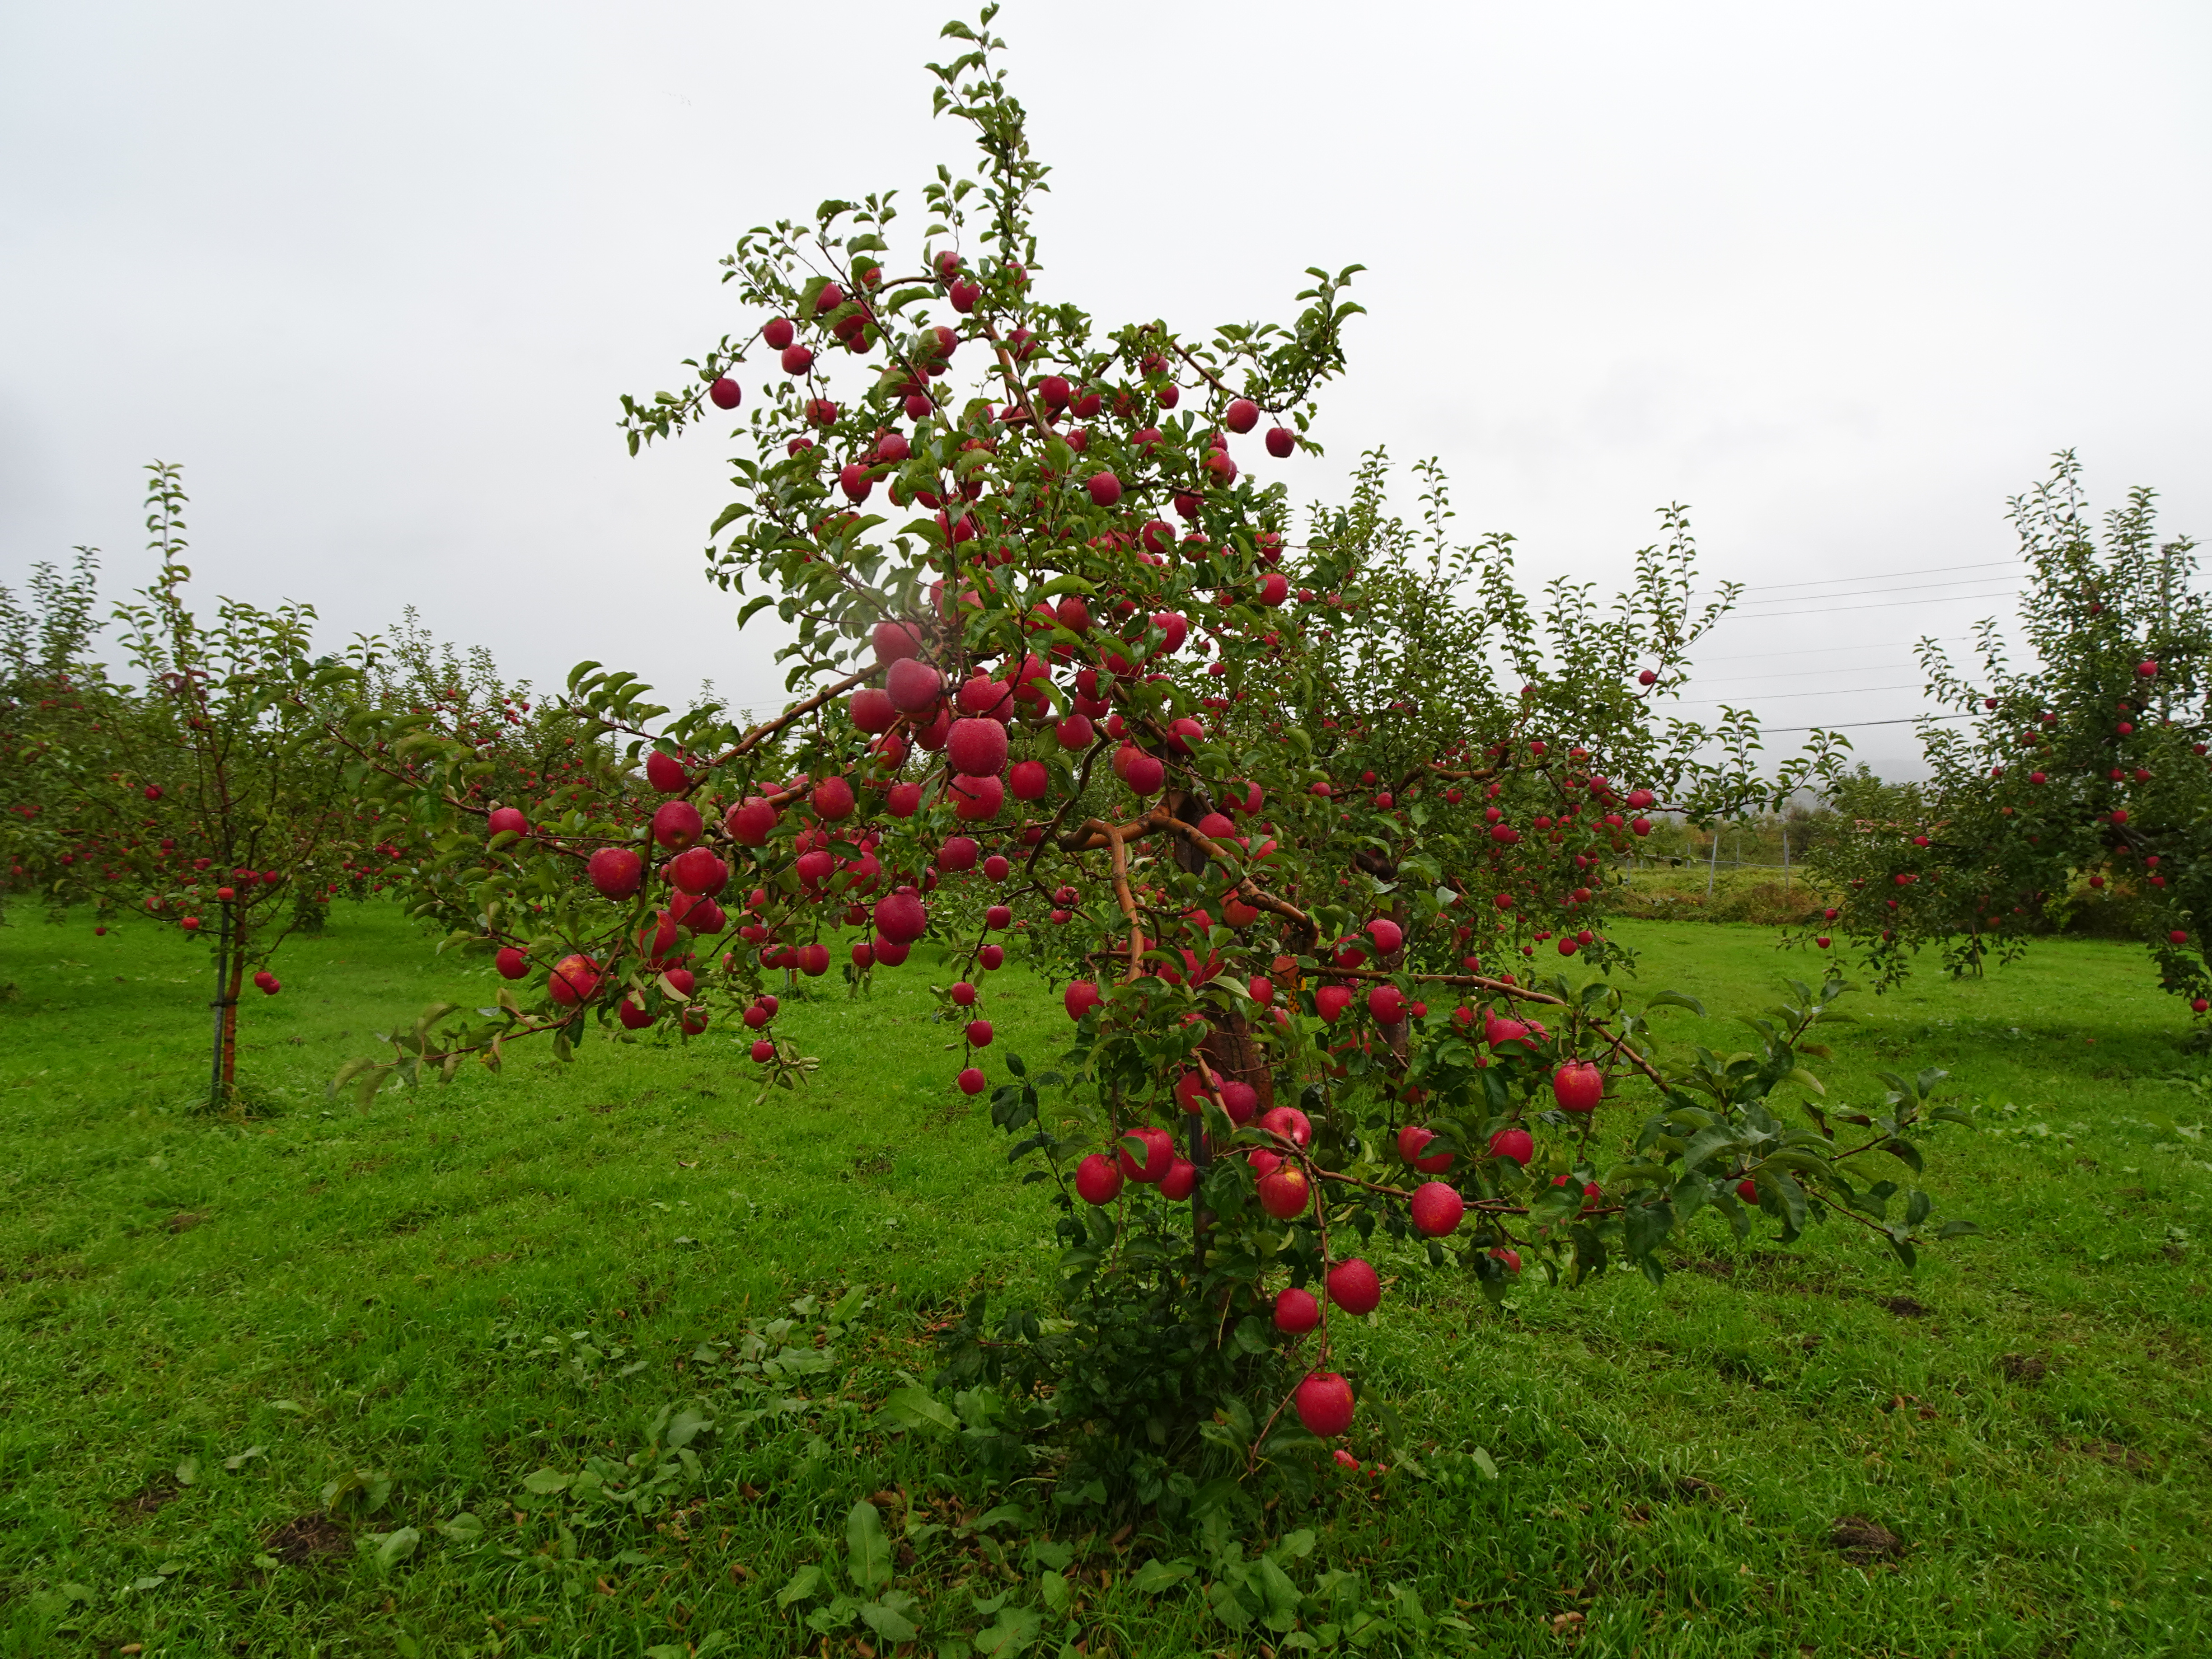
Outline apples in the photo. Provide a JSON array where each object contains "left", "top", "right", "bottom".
[
  {"left": 806, "top": 399, "right": 837, "bottom": 428},
  {"left": 957, "top": 674, "right": 1014, "bottom": 724},
  {"left": 1044, "top": 407, "right": 1061, "bottom": 426},
  {"left": 1209, "top": 460, "right": 1237, "bottom": 489},
  {"left": 1055, "top": 886, "right": 1079, "bottom": 906},
  {"left": 958, "top": 485, "right": 983, "bottom": 500},
  {"left": 1365, "top": 920, "right": 1402, "bottom": 956},
  {"left": 1248, "top": 835, "right": 1280, "bottom": 870},
  {"left": 858, "top": 453, "right": 889, "bottom": 482},
  {"left": 1411, "top": 1183, "right": 1463, "bottom": 1237},
  {"left": 1197, "top": 813, "right": 1235, "bottom": 849},
  {"left": 1075, "top": 1154, "right": 1124, "bottom": 1206},
  {"left": 1133, "top": 428, "right": 1165, "bottom": 459},
  {"left": 911, "top": 708, "right": 952, "bottom": 751},
  {"left": 1101, "top": 589, "right": 1134, "bottom": 621},
  {"left": 949, "top": 280, "right": 980, "bottom": 313},
  {"left": 704, "top": 858, "right": 728, "bottom": 897},
  {"left": 1453, "top": 1006, "right": 1495, "bottom": 1044},
  {"left": 739, "top": 910, "right": 763, "bottom": 925},
  {"left": 1161, "top": 949, "right": 1205, "bottom": 990},
  {"left": 958, "top": 1068, "right": 985, "bottom": 1095},
  {"left": 647, "top": 743, "right": 695, "bottom": 793},
  {"left": 757, "top": 782, "right": 788, "bottom": 826},
  {"left": 791, "top": 549, "right": 815, "bottom": 563},
  {"left": 1164, "top": 1061, "right": 1187, "bottom": 1080},
  {"left": 971, "top": 408, "right": 993, "bottom": 424},
  {"left": 958, "top": 465, "right": 984, "bottom": 489},
  {"left": 1202, "top": 1127, "right": 1208, "bottom": 1146},
  {"left": 886, "top": 658, "right": 941, "bottom": 713},
  {"left": 487, "top": 807, "right": 528, "bottom": 847},
  {"left": 953, "top": 552, "right": 982, "bottom": 579},
  {"left": 874, "top": 895, "right": 925, "bottom": 945},
  {"left": 813, "top": 517, "right": 841, "bottom": 539},
  {"left": 809, "top": 887, "right": 837, "bottom": 905},
  {"left": 901, "top": 369, "right": 929, "bottom": 397},
  {"left": 1150, "top": 613, "right": 1187, "bottom": 653},
  {"left": 1003, "top": 653, "right": 1050, "bottom": 704},
  {"left": 1076, "top": 669, "right": 1111, "bottom": 701},
  {"left": 967, "top": 1020, "right": 993, "bottom": 1048},
  {"left": 1225, "top": 850, "right": 1239, "bottom": 863},
  {"left": 1023, "top": 605, "right": 1056, "bottom": 638},
  {"left": 1315, "top": 986, "right": 1353, "bottom": 1024},
  {"left": 669, "top": 890, "right": 710, "bottom": 928},
  {"left": 1554, "top": 1064, "right": 1602, "bottom": 1113},
  {"left": 1068, "top": 429, "right": 1087, "bottom": 452},
  {"left": 1136, "top": 576, "right": 1165, "bottom": 605},
  {"left": 661, "top": 969, "right": 695, "bottom": 1000},
  {"left": 1255, "top": 531, "right": 1282, "bottom": 564},
  {"left": 981, "top": 523, "right": 986, "bottom": 533},
  {"left": 1140, "top": 353, "right": 1168, "bottom": 377},
  {"left": 723, "top": 952, "right": 741, "bottom": 975},
  {"left": 1145, "top": 674, "right": 1171, "bottom": 701},
  {"left": 872, "top": 621, "right": 922, "bottom": 669},
  {"left": 676, "top": 952, "right": 696, "bottom": 969},
  {"left": 892, "top": 864, "right": 912, "bottom": 883},
  {"left": 888, "top": 483, "right": 915, "bottom": 506},
  {"left": 620, "top": 990, "right": 660, "bottom": 1029},
  {"left": 760, "top": 945, "right": 782, "bottom": 969},
  {"left": 1265, "top": 428, "right": 1295, "bottom": 458},
  {"left": 1035, "top": 484, "right": 1049, "bottom": 510},
  {"left": 959, "top": 568, "right": 997, "bottom": 595},
  {"left": 1118, "top": 624, "right": 1143, "bottom": 647},
  {"left": 886, "top": 783, "right": 924, "bottom": 819},
  {"left": 654, "top": 801, "right": 703, "bottom": 852},
  {"left": 928, "top": 326, "right": 957, "bottom": 358},
  {"left": 1488, "top": 1248, "right": 1520, "bottom": 1274},
  {"left": 978, "top": 945, "right": 1004, "bottom": 970},
  {"left": 763, "top": 318, "right": 793, "bottom": 350},
  {"left": 943, "top": 441, "right": 965, "bottom": 470},
  {"left": 1283, "top": 920, "right": 1319, "bottom": 947},
  {"left": 726, "top": 796, "right": 777, "bottom": 847},
  {"left": 984, "top": 404, "right": 994, "bottom": 417},
  {"left": 1339, "top": 977, "right": 1358, "bottom": 990},
  {"left": 1258, "top": 1006, "right": 1291, "bottom": 1035},
  {"left": 1002, "top": 518, "right": 1018, "bottom": 534},
  {"left": 1118, "top": 658, "right": 1144, "bottom": 684},
  {"left": 1119, "top": 1127, "right": 1174, "bottom": 1183},
  {"left": 1247, "top": 1148, "right": 1290, "bottom": 1194},
  {"left": 850, "top": 688, "right": 895, "bottom": 733},
  {"left": 1203, "top": 947, "right": 1225, "bottom": 981},
  {"left": 1520, "top": 1019, "right": 1549, "bottom": 1051},
  {"left": 1569, "top": 1058, "right": 1595, "bottom": 1068},
  {"left": 751, "top": 1039, "right": 774, "bottom": 1063},
  {"left": 936, "top": 590, "right": 970, "bottom": 627},
  {"left": 1145, "top": 652, "right": 1162, "bottom": 666},
  {"left": 1736, "top": 1175, "right": 1759, "bottom": 1205},
  {"left": 1026, "top": 695, "right": 1050, "bottom": 719},
  {"left": 1113, "top": 388, "right": 1140, "bottom": 418},
  {"left": 845, "top": 300, "right": 874, "bottom": 333},
  {"left": 930, "top": 580, "right": 951, "bottom": 605},
  {"left": 836, "top": 511, "right": 860, "bottom": 531},
  {"left": 1159, "top": 1158, "right": 1198, "bottom": 1202},
  {"left": 1332, "top": 933, "right": 1367, "bottom": 969},
  {"left": 743, "top": 1007, "right": 767, "bottom": 1030},
  {"left": 986, "top": 906, "right": 1011, "bottom": 930},
  {"left": 1324, "top": 1045, "right": 1349, "bottom": 1079},
  {"left": 1062, "top": 436, "right": 1078, "bottom": 453},
  {"left": 984, "top": 856, "right": 1009, "bottom": 883},
  {"left": 1271, "top": 955, "right": 1299, "bottom": 989},
  {"left": 1256, "top": 573, "right": 1288, "bottom": 606},
  {"left": 878, "top": 434, "right": 909, "bottom": 466},
  {"left": 846, "top": 1636, "right": 856, "bottom": 1647},
  {"left": 795, "top": 830, "right": 829, "bottom": 858},
  {"left": 1106, "top": 982, "right": 1138, "bottom": 1028},
  {"left": 915, "top": 488, "right": 943, "bottom": 509},
  {"left": 905, "top": 395, "right": 932, "bottom": 422},
  {"left": 1039, "top": 376, "right": 1069, "bottom": 409},
  {"left": 797, "top": 944, "right": 830, "bottom": 976},
  {"left": 815, "top": 822, "right": 845, "bottom": 842},
  {"left": 928, "top": 557, "right": 943, "bottom": 572},
  {"left": 1220, "top": 889, "right": 1258, "bottom": 928},
  {"left": 1166, "top": 718, "right": 1203, "bottom": 755},
  {"left": 1122, "top": 512, "right": 1142, "bottom": 540},
  {"left": 740, "top": 924, "right": 767, "bottom": 945},
  {"left": 1097, "top": 646, "right": 1130, "bottom": 682},
  {"left": 588, "top": 848, "right": 642, "bottom": 901},
  {"left": 1228, "top": 781, "right": 1263, "bottom": 818},
  {"left": 1039, "top": 448, "right": 1072, "bottom": 482},
  {"left": 874, "top": 427, "right": 903, "bottom": 444},
  {"left": 681, "top": 1006, "right": 708, "bottom": 1035},
  {"left": 1113, "top": 747, "right": 1150, "bottom": 782},
  {"left": 937, "top": 847, "right": 955, "bottom": 873},
  {"left": 789, "top": 774, "right": 809, "bottom": 802},
  {"left": 841, "top": 464, "right": 873, "bottom": 501},
  {"left": 705, "top": 907, "right": 725, "bottom": 934},
  {"left": 863, "top": 777, "right": 890, "bottom": 789},
  {"left": 1295, "top": 1372, "right": 1354, "bottom": 1438},
  {"left": 972, "top": 666, "right": 989, "bottom": 678},
  {"left": 1126, "top": 758, "right": 1164, "bottom": 796},
  {"left": 935, "top": 511, "right": 973, "bottom": 549},
  {"left": 1056, "top": 714, "right": 1093, "bottom": 752},
  {"left": 1368, "top": 985, "right": 1408, "bottom": 1025},
  {"left": 1016, "top": 819, "right": 1041, "bottom": 846},
  {"left": 781, "top": 344, "right": 812, "bottom": 375},
  {"left": 1551, "top": 1175, "right": 1599, "bottom": 1219},
  {"left": 1226, "top": 399, "right": 1259, "bottom": 433},
  {"left": 943, "top": 837, "right": 977, "bottom": 871},
  {"left": 987, "top": 535, "right": 1025, "bottom": 570},
  {"left": 639, "top": 910, "right": 677, "bottom": 956},
  {"left": 1042, "top": 516, "right": 1071, "bottom": 541},
  {"left": 1068, "top": 386, "right": 1101, "bottom": 419},
  {"left": 1050, "top": 909, "right": 1073, "bottom": 925},
  {"left": 754, "top": 995, "right": 778, "bottom": 1018},
  {"left": 948, "top": 773, "right": 1003, "bottom": 821},
  {"left": 836, "top": 839, "right": 874, "bottom": 865},
  {"left": 833, "top": 320, "right": 856, "bottom": 341},
  {"left": 1004, "top": 262, "right": 1027, "bottom": 288},
  {"left": 1327, "top": 1258, "right": 1381, "bottom": 1315},
  {"left": 848, "top": 332, "right": 870, "bottom": 355},
  {"left": 849, "top": 827, "right": 880, "bottom": 848},
  {"left": 874, "top": 932, "right": 910, "bottom": 966},
  {"left": 1332, "top": 1031, "right": 1371, "bottom": 1066},
  {"left": 1009, "top": 761, "right": 1048, "bottom": 801},
  {"left": 1075, "top": 690, "right": 1111, "bottom": 720},
  {"left": 1117, "top": 937, "right": 1156, "bottom": 966},
  {"left": 1151, "top": 554, "right": 1163, "bottom": 565},
  {"left": 1217, "top": 793, "right": 1237, "bottom": 821},
  {"left": 1107, "top": 531, "right": 1133, "bottom": 553},
  {"left": 548, "top": 954, "right": 604, "bottom": 1007},
  {"left": 1047, "top": 644, "right": 1074, "bottom": 665},
  {"left": 649, "top": 956, "right": 677, "bottom": 973},
  {"left": 852, "top": 944, "right": 876, "bottom": 968},
  {"left": 1175, "top": 1069, "right": 1226, "bottom": 1115},
  {"left": 1087, "top": 472, "right": 1121, "bottom": 507},
  {"left": 911, "top": 871, "right": 937, "bottom": 892},
  {"left": 796, "top": 851, "right": 834, "bottom": 890},
  {"left": 670, "top": 847, "right": 718, "bottom": 896},
  {"left": 922, "top": 357, "right": 948, "bottom": 376},
  {"left": 846, "top": 763, "right": 852, "bottom": 768},
  {"left": 903, "top": 737, "right": 911, "bottom": 759},
  {"left": 1182, "top": 534, "right": 1208, "bottom": 562},
  {"left": 1532, "top": 1065, "right": 1553, "bottom": 1084},
  {"left": 1259, "top": 1107, "right": 1311, "bottom": 1157},
  {"left": 970, "top": 500, "right": 980, "bottom": 509},
  {"left": 1397, "top": 1126, "right": 1432, "bottom": 1164},
  {"left": 810, "top": 776, "right": 854, "bottom": 822},
  {"left": 1201, "top": 447, "right": 1230, "bottom": 482},
  {"left": 693, "top": 897, "right": 715, "bottom": 933},
  {"left": 1155, "top": 384, "right": 1179, "bottom": 409},
  {"left": 889, "top": 886, "right": 920, "bottom": 901},
  {"left": 1143, "top": 521, "right": 1175, "bottom": 553},
  {"left": 1007, "top": 329, "right": 1036, "bottom": 362},
  {"left": 854, "top": 267, "right": 881, "bottom": 289},
  {"left": 946, "top": 755, "right": 958, "bottom": 778},
  {"left": 1224, "top": 1081, "right": 1257, "bottom": 1124},
  {"left": 1412, "top": 1134, "right": 1454, "bottom": 1174},
  {"left": 927, "top": 866, "right": 933, "bottom": 870},
  {"left": 940, "top": 493, "right": 965, "bottom": 508},
  {"left": 947, "top": 718, "right": 1008, "bottom": 778},
  {"left": 1489, "top": 1129, "right": 1533, "bottom": 1168},
  {"left": 1000, "top": 405, "right": 1027, "bottom": 430},
  {"left": 1139, "top": 968, "right": 1162, "bottom": 1004},
  {"left": 951, "top": 982, "right": 975, "bottom": 1006},
  {"left": 710, "top": 378, "right": 741, "bottom": 409},
  {"left": 788, "top": 438, "right": 813, "bottom": 459},
  {"left": 1174, "top": 487, "right": 1204, "bottom": 519},
  {"left": 601, "top": 974, "right": 635, "bottom": 996},
  {"left": 840, "top": 852, "right": 881, "bottom": 897},
  {"left": 1136, "top": 552, "right": 1153, "bottom": 565},
  {"left": 659, "top": 864, "right": 675, "bottom": 885},
  {"left": 766, "top": 922, "right": 786, "bottom": 944},
  {"left": 984, "top": 438, "right": 996, "bottom": 455},
  {"left": 1388, "top": 1071, "right": 1429, "bottom": 1105},
  {"left": 1178, "top": 904, "right": 1214, "bottom": 940},
  {"left": 882, "top": 366, "right": 906, "bottom": 397},
  {"left": 1107, "top": 714, "right": 1131, "bottom": 740},
  {"left": 965, "top": 438, "right": 990, "bottom": 457},
  {"left": 870, "top": 734, "right": 906, "bottom": 771},
  {"left": 933, "top": 251, "right": 961, "bottom": 278},
  {"left": 1208, "top": 433, "right": 1227, "bottom": 453},
  {"left": 1057, "top": 601, "right": 1089, "bottom": 634},
  {"left": 816, "top": 283, "right": 843, "bottom": 314},
  {"left": 1065, "top": 980, "right": 1104, "bottom": 1022},
  {"left": 1178, "top": 1014, "right": 1208, "bottom": 1048},
  {"left": 903, "top": 707, "right": 942, "bottom": 722},
  {"left": 749, "top": 888, "right": 773, "bottom": 908},
  {"left": 495, "top": 946, "right": 532, "bottom": 980},
  {"left": 994, "top": 757, "right": 1008, "bottom": 777},
  {"left": 780, "top": 946, "right": 801, "bottom": 969},
  {"left": 798, "top": 884, "right": 809, "bottom": 896},
  {"left": 843, "top": 901, "right": 867, "bottom": 926},
  {"left": 891, "top": 713, "right": 903, "bottom": 727},
  {"left": 925, "top": 666, "right": 948, "bottom": 709},
  {"left": 1202, "top": 867, "right": 1230, "bottom": 880},
  {"left": 1259, "top": 1165, "right": 1309, "bottom": 1219},
  {"left": 1248, "top": 976, "right": 1273, "bottom": 1011},
  {"left": 1488, "top": 1019, "right": 1531, "bottom": 1058},
  {"left": 1272, "top": 1288, "right": 1319, "bottom": 1335},
  {"left": 794, "top": 448, "right": 821, "bottom": 478},
  {"left": 1088, "top": 536, "right": 1113, "bottom": 554},
  {"left": 799, "top": 816, "right": 813, "bottom": 831}
]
